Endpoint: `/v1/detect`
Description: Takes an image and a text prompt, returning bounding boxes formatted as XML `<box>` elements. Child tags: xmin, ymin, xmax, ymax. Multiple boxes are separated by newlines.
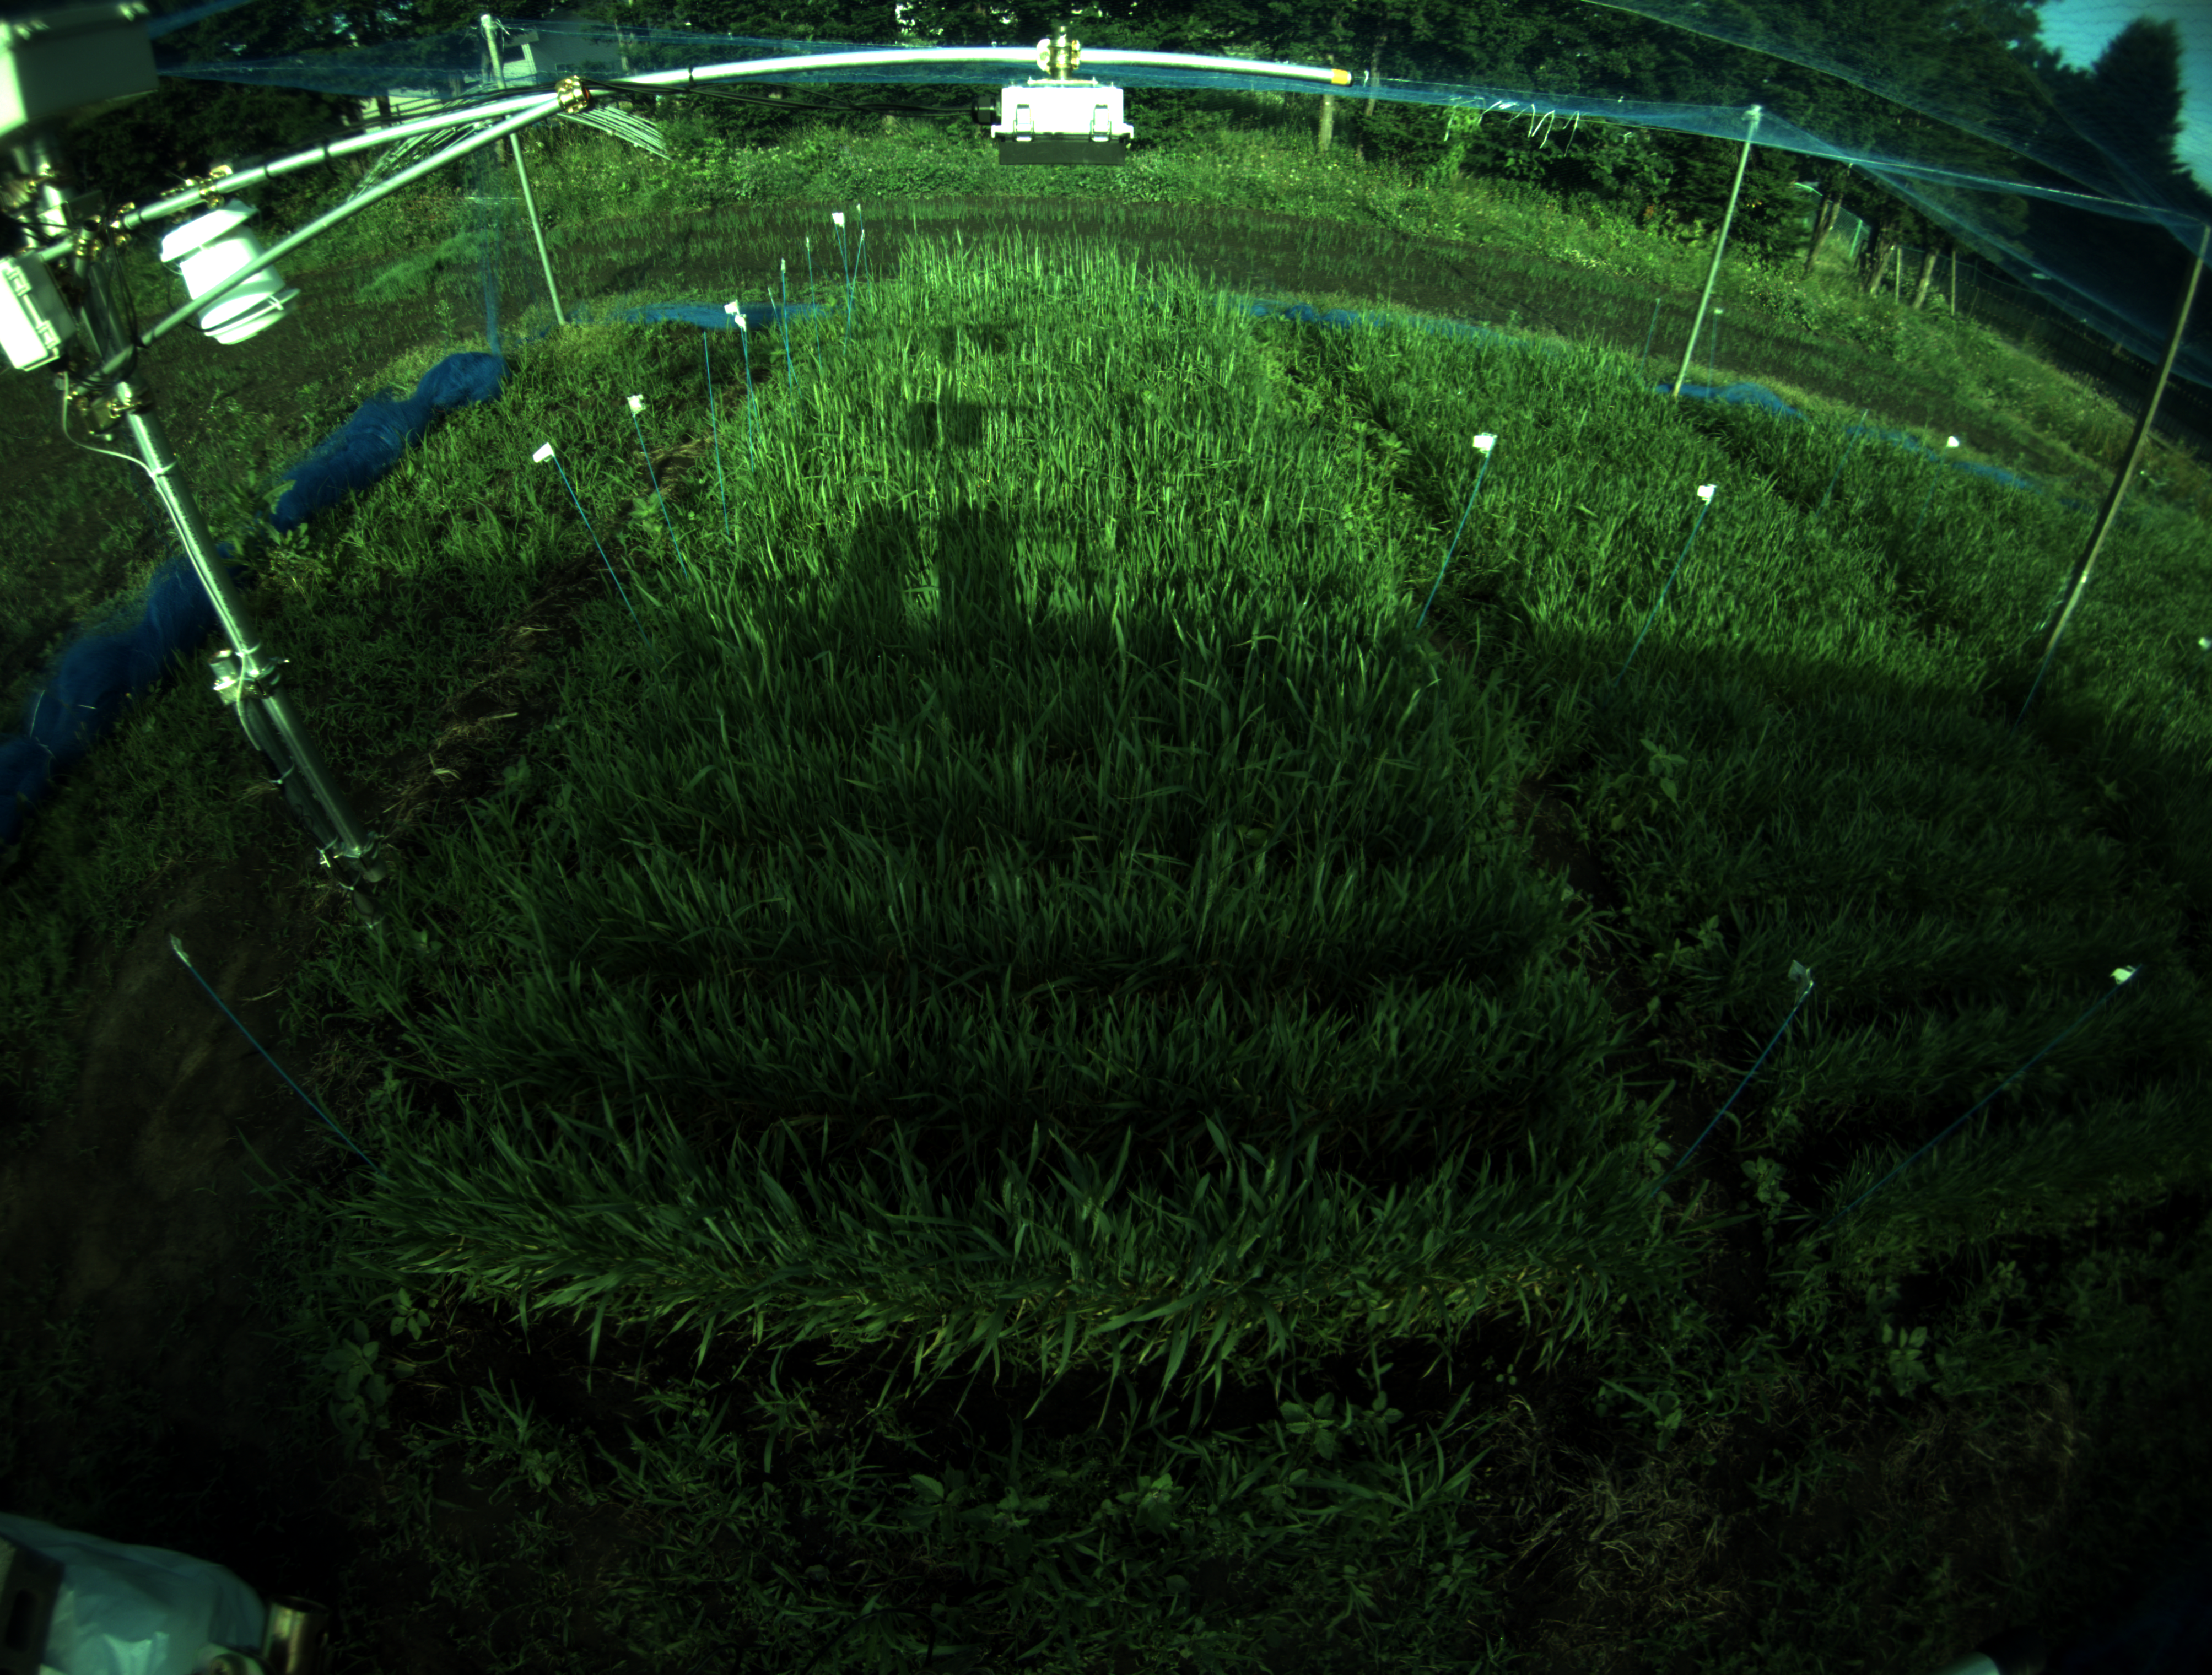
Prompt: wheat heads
<box><xmin>791</xmin><ymin>417</ymin><xmax>796</xmax><ymax>436</ymax></box>
<box><xmin>916</xmin><ymin>461</ymin><xmax>919</xmax><ymax>472</ymax></box>
<box><xmin>1341</xmin><ymin>487</ymin><xmax>1348</xmax><ymax>502</ymax></box>
<box><xmin>565</xmin><ymin>882</ymin><xmax>575</xmax><ymax>900</ymax></box>
<box><xmin>1002</xmin><ymin>1177</ymin><xmax>1009</xmax><ymax>1202</ymax></box>
<box><xmin>1128</xmin><ymin>289</ymin><xmax>1133</xmax><ymax>301</ymax></box>
<box><xmin>745</xmin><ymin>660</ymin><xmax>753</xmax><ymax>681</ymax></box>
<box><xmin>967</xmin><ymin>480</ymin><xmax>972</xmax><ymax>497</ymax></box>
<box><xmin>1447</xmin><ymin>737</ymin><xmax>1454</xmax><ymax>767</ymax></box>
<box><xmin>1385</xmin><ymin>1045</ymin><xmax>1394</xmax><ymax>1060</ymax></box>
<box><xmin>949</xmin><ymin>370</ymin><xmax>952</xmax><ymax>389</ymax></box>
<box><xmin>1187</xmin><ymin>761</ymin><xmax>1194</xmax><ymax>779</ymax></box>
<box><xmin>1342</xmin><ymin>503</ymin><xmax>1347</xmax><ymax>513</ymax></box>
<box><xmin>1039</xmin><ymin>458</ymin><xmax>1043</xmax><ymax>475</ymax></box>
<box><xmin>1076</xmin><ymin>418</ymin><xmax>1080</xmax><ymax>446</ymax></box>
<box><xmin>654</xmin><ymin>631</ymin><xmax>662</xmax><ymax>653</ymax></box>
<box><xmin>1266</xmin><ymin>360</ymin><xmax>1271</xmax><ymax>378</ymax></box>
<box><xmin>929</xmin><ymin>488</ymin><xmax>934</xmax><ymax>498</ymax></box>
<box><xmin>1058</xmin><ymin>495</ymin><xmax>1063</xmax><ymax>508</ymax></box>
<box><xmin>1174</xmin><ymin>433</ymin><xmax>1178</xmax><ymax>449</ymax></box>
<box><xmin>820</xmin><ymin>400</ymin><xmax>824</xmax><ymax>426</ymax></box>
<box><xmin>1311</xmin><ymin>704</ymin><xmax>1318</xmax><ymax>740</ymax></box>
<box><xmin>1085</xmin><ymin>1196</ymin><xmax>1093</xmax><ymax>1216</ymax></box>
<box><xmin>617</xmin><ymin>730</ymin><xmax>625</xmax><ymax>744</ymax></box>
<box><xmin>963</xmin><ymin>361</ymin><xmax>969</xmax><ymax>380</ymax></box>
<box><xmin>1012</xmin><ymin>743</ymin><xmax>1018</xmax><ymax>771</ymax></box>
<box><xmin>1065</xmin><ymin>435</ymin><xmax>1069</xmax><ymax>451</ymax></box>
<box><xmin>793</xmin><ymin>1215</ymin><xmax>804</xmax><ymax>1239</ymax></box>
<box><xmin>1359</xmin><ymin>747</ymin><xmax>1372</xmax><ymax>772</ymax></box>
<box><xmin>979</xmin><ymin>275</ymin><xmax>986</xmax><ymax>295</ymax></box>
<box><xmin>693</xmin><ymin>879</ymin><xmax>708</xmax><ymax>907</ymax></box>
<box><xmin>1007</xmin><ymin>418</ymin><xmax>1014</xmax><ymax>428</ymax></box>
<box><xmin>1337</xmin><ymin>755</ymin><xmax>1348</xmax><ymax>777</ymax></box>
<box><xmin>928</xmin><ymin>475</ymin><xmax>932</xmax><ymax>485</ymax></box>
<box><xmin>1092</xmin><ymin>1203</ymin><xmax>1101</xmax><ymax>1224</ymax></box>
<box><xmin>1422</xmin><ymin>737</ymin><xmax>1436</xmax><ymax>775</ymax></box>
<box><xmin>880</xmin><ymin>390</ymin><xmax>884</xmax><ymax>411</ymax></box>
<box><xmin>1178</xmin><ymin>667</ymin><xmax>1184</xmax><ymax>696</ymax></box>
<box><xmin>1121</xmin><ymin>659</ymin><xmax>1126</xmax><ymax>692</ymax></box>
<box><xmin>1098</xmin><ymin>260</ymin><xmax>1104</xmax><ymax>276</ymax></box>
<box><xmin>1218</xmin><ymin>870</ymin><xmax>1226</xmax><ymax>894</ymax></box>
<box><xmin>1595</xmin><ymin>501</ymin><xmax>1601</xmax><ymax>512</ymax></box>
<box><xmin>765</xmin><ymin>639</ymin><xmax>771</xmax><ymax>662</ymax></box>
<box><xmin>1841</xmin><ymin>1211</ymin><xmax>1858</xmax><ymax>1224</ymax></box>
<box><xmin>759</xmin><ymin>419</ymin><xmax>764</xmax><ymax>429</ymax></box>
<box><xmin>1148</xmin><ymin>899</ymin><xmax>1153</xmax><ymax>909</ymax></box>
<box><xmin>1309</xmin><ymin>650</ymin><xmax>1316</xmax><ymax>666</ymax></box>
<box><xmin>1249</xmin><ymin>431</ymin><xmax>1253</xmax><ymax>439</ymax></box>
<box><xmin>949</xmin><ymin>760</ymin><xmax>953</xmax><ymax>782</ymax></box>
<box><xmin>423</xmin><ymin>944</ymin><xmax>437</xmax><ymax>960</ymax></box>
<box><xmin>1254</xmin><ymin>852</ymin><xmax>1264</xmax><ymax>877</ymax></box>
<box><xmin>1165</xmin><ymin>397</ymin><xmax>1171</xmax><ymax>413</ymax></box>
<box><xmin>1029</xmin><ymin>1199</ymin><xmax>1034</xmax><ymax>1222</ymax></box>
<box><xmin>834</xmin><ymin>394</ymin><xmax>838</xmax><ymax>413</ymax></box>
<box><xmin>893</xmin><ymin>290</ymin><xmax>898</xmax><ymax>300</ymax></box>
<box><xmin>1248</xmin><ymin>744</ymin><xmax>1258</xmax><ymax>761</ymax></box>
<box><xmin>853</xmin><ymin>772</ymin><xmax>863</xmax><ymax>793</ymax></box>
<box><xmin>845</xmin><ymin>394</ymin><xmax>852</xmax><ymax>413</ymax></box>
<box><xmin>1001</xmin><ymin>597</ymin><xmax>1005</xmax><ymax>620</ymax></box>
<box><xmin>914</xmin><ymin>1200</ymin><xmax>931</xmax><ymax>1233</ymax></box>
<box><xmin>506</xmin><ymin>817</ymin><xmax>512</xmax><ymax>832</ymax></box>
<box><xmin>1210</xmin><ymin>660</ymin><xmax>1217</xmax><ymax>684</ymax></box>
<box><xmin>1130</xmin><ymin>782</ymin><xmax>1136</xmax><ymax>798</ymax></box>
<box><xmin>1525</xmin><ymin>959</ymin><xmax>1531</xmax><ymax>976</ymax></box>
<box><xmin>936</xmin><ymin>374</ymin><xmax>941</xmax><ymax>396</ymax></box>
<box><xmin>1221</xmin><ymin>734</ymin><xmax>1230</xmax><ymax>753</ymax></box>
<box><xmin>540</xmin><ymin>828</ymin><xmax>552</xmax><ymax>845</ymax></box>
<box><xmin>813</xmin><ymin>383</ymin><xmax>820</xmax><ymax>409</ymax></box>
<box><xmin>1115</xmin><ymin>910</ymin><xmax>1122</xmax><ymax>920</ymax></box>
<box><xmin>1373</xmin><ymin>747</ymin><xmax>1388</xmax><ymax>776</ymax></box>
<box><xmin>692</xmin><ymin>602</ymin><xmax>700</xmax><ymax>618</ymax></box>
<box><xmin>894</xmin><ymin>867</ymin><xmax>900</xmax><ymax>880</ymax></box>
<box><xmin>1071</xmin><ymin>1249</ymin><xmax>1078</xmax><ymax>1265</ymax></box>
<box><xmin>1401</xmin><ymin>325</ymin><xmax>1407</xmax><ymax>343</ymax></box>
<box><xmin>764</xmin><ymin>886</ymin><xmax>767</xmax><ymax>894</ymax></box>
<box><xmin>1461</xmin><ymin>912</ymin><xmax>1470</xmax><ymax>925</ymax></box>
<box><xmin>904</xmin><ymin>383</ymin><xmax>908</xmax><ymax>400</ymax></box>
<box><xmin>633</xmin><ymin>1199</ymin><xmax>650</xmax><ymax>1212</ymax></box>
<box><xmin>1650</xmin><ymin>1214</ymin><xmax>1662</xmax><ymax>1235</ymax></box>
<box><xmin>1012</xmin><ymin>1191</ymin><xmax>1019</xmax><ymax>1220</ymax></box>
<box><xmin>1108</xmin><ymin>253</ymin><xmax>1115</xmax><ymax>269</ymax></box>
<box><xmin>956</xmin><ymin>230</ymin><xmax>962</xmax><ymax>246</ymax></box>
<box><xmin>1189</xmin><ymin>740</ymin><xmax>1195</xmax><ymax>757</ymax></box>
<box><xmin>665</xmin><ymin>1277</ymin><xmax>679</xmax><ymax>1285</ymax></box>
<box><xmin>840</xmin><ymin>414</ymin><xmax>844</xmax><ymax>441</ymax></box>
<box><xmin>1218</xmin><ymin>396</ymin><xmax>1223</xmax><ymax>410</ymax></box>
<box><xmin>1566</xmin><ymin>981</ymin><xmax>1575</xmax><ymax>998</ymax></box>
<box><xmin>1321</xmin><ymin>669</ymin><xmax>1333</xmax><ymax>698</ymax></box>
<box><xmin>791</xmin><ymin>443</ymin><xmax>797</xmax><ymax>463</ymax></box>
<box><xmin>1353</xmin><ymin>703</ymin><xmax>1359</xmax><ymax>734</ymax></box>
<box><xmin>529</xmin><ymin>1181</ymin><xmax>542</xmax><ymax>1199</ymax></box>
<box><xmin>787</xmin><ymin>749</ymin><xmax>793</xmax><ymax>769</ymax></box>
<box><xmin>924</xmin><ymin>881</ymin><xmax>930</xmax><ymax>892</ymax></box>
<box><xmin>1854</xmin><ymin>1204</ymin><xmax>1870</xmax><ymax>1222</ymax></box>
<box><xmin>823</xmin><ymin>382</ymin><xmax>828</xmax><ymax>392</ymax></box>
<box><xmin>723</xmin><ymin>667</ymin><xmax>730</xmax><ymax>693</ymax></box>
<box><xmin>619</xmin><ymin>1141</ymin><xmax>636</xmax><ymax>1169</ymax></box>
<box><xmin>956</xmin><ymin>382</ymin><xmax>961</xmax><ymax>404</ymax></box>
<box><xmin>653</xmin><ymin>835</ymin><xmax>667</xmax><ymax>866</ymax></box>
<box><xmin>1230</xmin><ymin>1211</ymin><xmax>1245</xmax><ymax>1238</ymax></box>
<box><xmin>757</xmin><ymin>499</ymin><xmax>761</xmax><ymax>509</ymax></box>
<box><xmin>900</xmin><ymin>312</ymin><xmax>904</xmax><ymax>325</ymax></box>
<box><xmin>912</xmin><ymin>216</ymin><xmax>916</xmax><ymax>231</ymax></box>
<box><xmin>1266</xmin><ymin>1158</ymin><xmax>1275</xmax><ymax>1190</ymax></box>
<box><xmin>687</xmin><ymin>602</ymin><xmax>696</xmax><ymax>617</ymax></box>
<box><xmin>1066</xmin><ymin>339</ymin><xmax>1073</xmax><ymax>356</ymax></box>
<box><xmin>871</xmin><ymin>398</ymin><xmax>874</xmax><ymax>409</ymax></box>
<box><xmin>1293</xmin><ymin>1036</ymin><xmax>1300</xmax><ymax>1049</ymax></box>
<box><xmin>916</xmin><ymin>387</ymin><xmax>921</xmax><ymax>403</ymax></box>
<box><xmin>1069</xmin><ymin>451</ymin><xmax>1072</xmax><ymax>470</ymax></box>
<box><xmin>1438</xmin><ymin>721</ymin><xmax>1445</xmax><ymax>745</ymax></box>
<box><xmin>1146</xmin><ymin>421</ymin><xmax>1149</xmax><ymax>439</ymax></box>
<box><xmin>905</xmin><ymin>335</ymin><xmax>911</xmax><ymax>352</ymax></box>
<box><xmin>1526</xmin><ymin>1008</ymin><xmax>1545</xmax><ymax>1020</ymax></box>
<box><xmin>1226</xmin><ymin>856</ymin><xmax>1231</xmax><ymax>866</ymax></box>
<box><xmin>679</xmin><ymin>605</ymin><xmax>686</xmax><ymax>619</ymax></box>
<box><xmin>758</xmin><ymin>442</ymin><xmax>761</xmax><ymax>451</ymax></box>
<box><xmin>1122</xmin><ymin>866</ymin><xmax>1131</xmax><ymax>897</ymax></box>
<box><xmin>1214</xmin><ymin>852</ymin><xmax>1222</xmax><ymax>867</ymax></box>
<box><xmin>1231</xmin><ymin>323</ymin><xmax>1235</xmax><ymax>337</ymax></box>
<box><xmin>1314</xmin><ymin>854</ymin><xmax>1325</xmax><ymax>880</ymax></box>
<box><xmin>1197</xmin><ymin>439</ymin><xmax>1203</xmax><ymax>454</ymax></box>
<box><xmin>761</xmin><ymin>638</ymin><xmax>768</xmax><ymax>665</ymax></box>
<box><xmin>1207</xmin><ymin>879</ymin><xmax>1214</xmax><ymax>905</ymax></box>
<box><xmin>400</xmin><ymin>913</ymin><xmax>409</xmax><ymax>926</ymax></box>
<box><xmin>1242</xmin><ymin>1169</ymin><xmax>1250</xmax><ymax>1196</ymax></box>
<box><xmin>1595</xmin><ymin>1014</ymin><xmax>1604</xmax><ymax>1028</ymax></box>
<box><xmin>679</xmin><ymin>888</ymin><xmax>686</xmax><ymax>905</ymax></box>
<box><xmin>884</xmin><ymin>461</ymin><xmax>889</xmax><ymax>480</ymax></box>
<box><xmin>955</xmin><ymin>486</ymin><xmax>960</xmax><ymax>499</ymax></box>
<box><xmin>1111</xmin><ymin>598</ymin><xmax>1119</xmax><ymax>623</ymax></box>
<box><xmin>941</xmin><ymin>710</ymin><xmax>951</xmax><ymax>737</ymax></box>
<box><xmin>1536</xmin><ymin>955</ymin><xmax>1545</xmax><ymax>973</ymax></box>
<box><xmin>822</xmin><ymin>388</ymin><xmax>826</xmax><ymax>403</ymax></box>
<box><xmin>917</xmin><ymin>741</ymin><xmax>922</xmax><ymax>762</ymax></box>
